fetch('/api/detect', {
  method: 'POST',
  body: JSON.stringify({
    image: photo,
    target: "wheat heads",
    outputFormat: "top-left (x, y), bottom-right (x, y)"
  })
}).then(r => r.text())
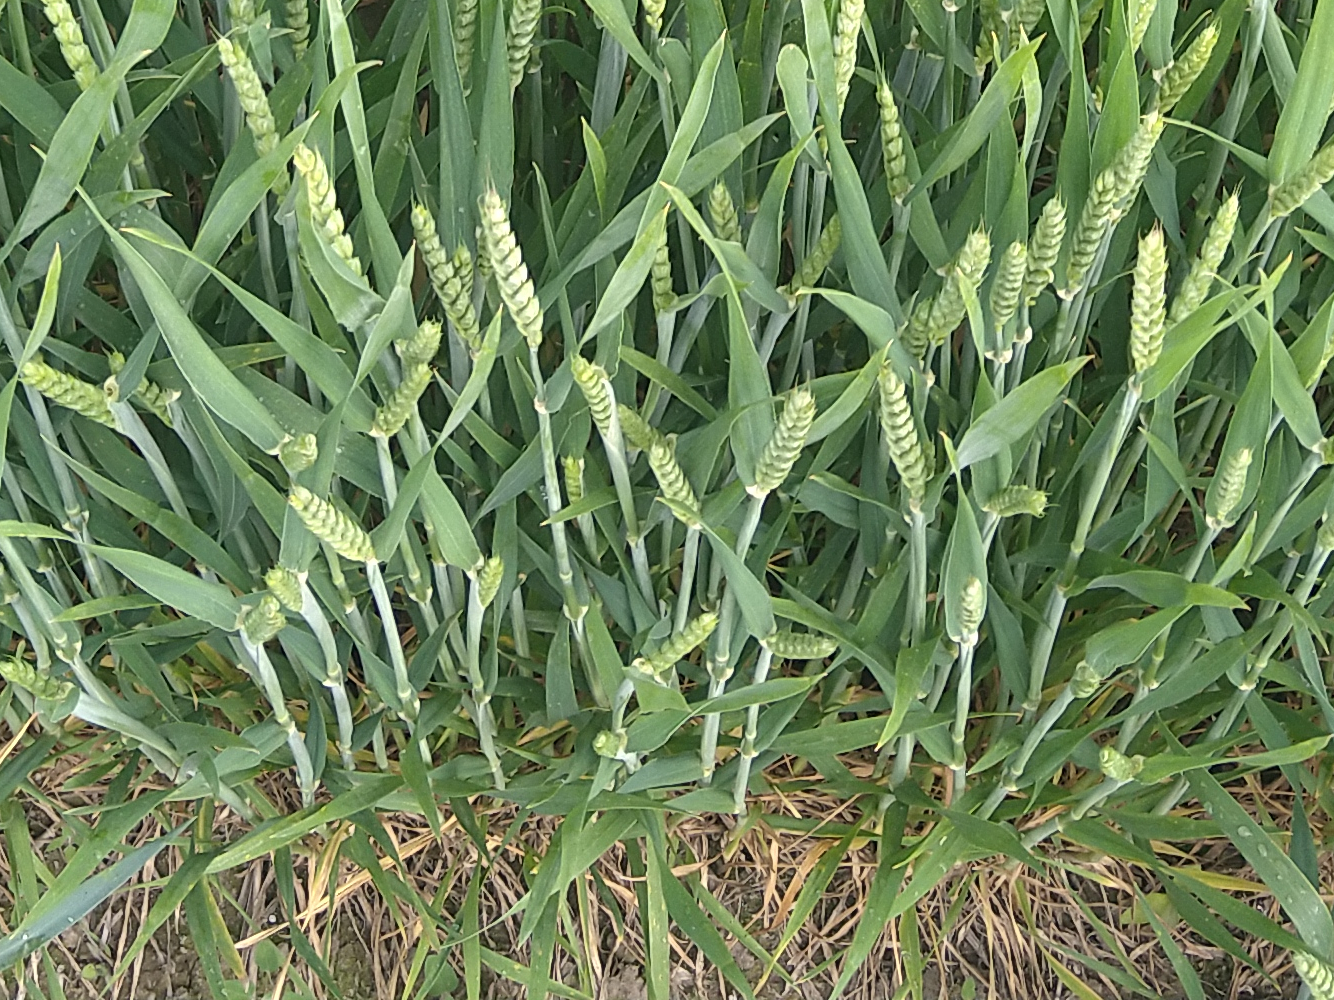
top-left (1070, 655), bottom-right (1103, 693)
top-left (479, 556), bottom-right (506, 603)
top-left (474, 227), bottom-right (494, 280)
top-left (479, 194), bottom-right (543, 347)
top-left (791, 212), bottom-right (845, 295)
top-left (0, 659), bottom-right (66, 697)
top-left (650, 226), bottom-right (675, 313)
top-left (1077, 0), bottom-right (1117, 24)
top-left (286, 480), bottom-right (380, 561)
top-left (411, 204), bottom-right (479, 349)
top-left (216, 34), bottom-right (287, 192)
top-left (900, 298), bottom-right (939, 356)
top-left (1069, 169), bottom-right (1116, 283)
top-left (985, 485), bottom-right (1045, 514)
top-left (1127, 223), bottom-right (1166, 372)
top-left (21, 0), bottom-right (98, 91)
top-left (1112, 107), bottom-right (1164, 224)
top-left (1122, 0), bottom-right (1171, 57)
top-left (454, 0), bottom-right (483, 77)
top-left (1209, 449), bottom-right (1253, 515)
top-left (272, 0), bottom-right (307, 57)
top-left (243, 598), bottom-right (285, 640)
top-left (106, 352), bottom-right (170, 424)
top-left (1172, 194), bottom-right (1241, 324)
top-left (878, 369), bottom-right (922, 498)
top-left (376, 365), bottom-right (433, 431)
top-left (756, 391), bottom-right (819, 489)
top-left (292, 145), bottom-right (370, 285)
top-left (21, 360), bottom-right (123, 431)
top-left (708, 183), bottom-right (745, 242)
top-left (508, 0), bottom-right (548, 86)
top-left (566, 462), bottom-right (583, 509)
top-left (1268, 140), bottom-right (1334, 224)
top-left (569, 349), bottom-right (608, 436)
top-left (631, 614), bottom-right (720, 675)
top-left (403, 318), bottom-right (442, 369)
top-left (1317, 268), bottom-right (1334, 373)
top-left (929, 234), bottom-right (991, 340)
top-left (454, 243), bottom-right (474, 301)
top-left (878, 81), bottom-right (909, 199)
top-left (981, 0), bottom-right (997, 23)
top-left (1027, 195), bottom-right (1066, 298)
top-left (1292, 950), bottom-right (1334, 1000)
top-left (959, 578), bottom-right (980, 651)
top-left (976, 1), bottom-right (1012, 63)
top-left (619, 404), bottom-right (675, 454)
top-left (830, 0), bottom-right (867, 117)
top-left (1148, 23), bottom-right (1220, 113)
top-left (1317, 503), bottom-right (1334, 551)
top-left (265, 566), bottom-right (306, 609)
top-left (985, 241), bottom-right (1030, 319)
top-left (281, 432), bottom-right (317, 473)
top-left (648, 444), bottom-right (702, 527)
top-left (756, 630), bottom-right (838, 660)
top-left (1005, 0), bottom-right (1046, 54)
